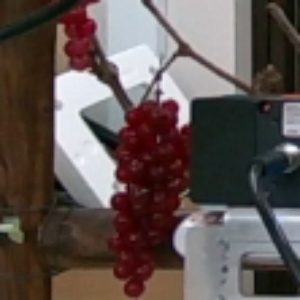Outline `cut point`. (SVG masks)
<instances>
[{
  "mask_svg": "<svg viewBox=\"0 0 300 300\" xmlns=\"http://www.w3.org/2000/svg\"><path fill=\"white\" fill-rule=\"evenodd\" d=\"M155 95L157 98V103H160V95H165V91H163V89H160V81H157V89H155Z\"/></svg>",
  "mask_w": 300,
  "mask_h": 300,
  "instance_id": "6a23745f",
  "label": "cut point"
}]
</instances>
